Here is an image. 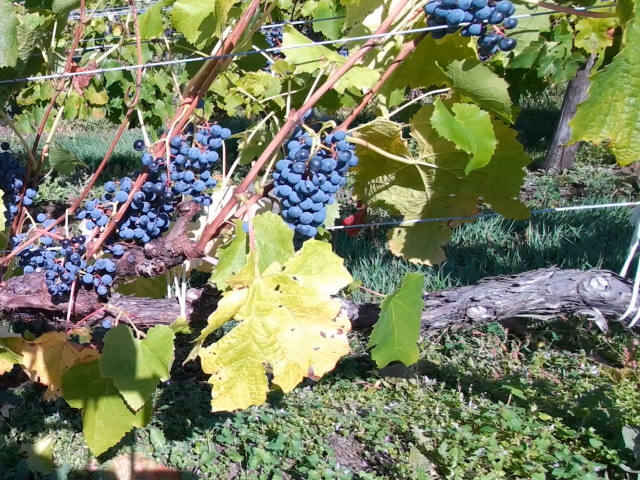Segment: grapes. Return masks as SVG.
<instances>
[{
    "label": "grapes",
    "instance_id": "e5b3c951",
    "mask_svg": "<svg viewBox=\"0 0 640 480\" xmlns=\"http://www.w3.org/2000/svg\"><path fill=\"white\" fill-rule=\"evenodd\" d=\"M27 238H28V235L26 233L15 234L14 236H11L9 238V244L11 245V248L14 250L15 248L18 247V245L21 243L22 240H26Z\"/></svg>",
    "mask_w": 640,
    "mask_h": 480
},
{
    "label": "grapes",
    "instance_id": "5460f4e3",
    "mask_svg": "<svg viewBox=\"0 0 640 480\" xmlns=\"http://www.w3.org/2000/svg\"><path fill=\"white\" fill-rule=\"evenodd\" d=\"M132 187V179L130 177H122L120 179V184L118 185V191L116 195L111 196L109 193H114L117 188V183L115 181H106L104 183V190L107 193L102 195V200L100 198H94L92 200H88L85 203V209H78L76 211V218L78 220H86L89 219L85 223V228L87 230H94L97 226H107L109 223V216L107 214H102V201L104 203H124L127 201L128 192Z\"/></svg>",
    "mask_w": 640,
    "mask_h": 480
},
{
    "label": "grapes",
    "instance_id": "84f90ec7",
    "mask_svg": "<svg viewBox=\"0 0 640 480\" xmlns=\"http://www.w3.org/2000/svg\"><path fill=\"white\" fill-rule=\"evenodd\" d=\"M86 237L84 235L72 236L70 239H64L60 246V254L66 255L67 262L65 267L60 263H54V259L57 256L55 249L44 250L42 247L29 244L17 254L20 260L27 261L28 265L22 267L24 274L32 273L36 270V266L40 269H48L45 273V283L48 285V292L50 295L56 294L62 295L65 291L71 289L70 283H72L80 270H84L87 274L82 276L84 283H92L95 285L96 292L100 295L107 293V286L113 282L111 275L95 276L92 274L95 271H104L105 273H114L116 265L107 257H99L93 262L92 265H87V262L82 258V254L86 251Z\"/></svg>",
    "mask_w": 640,
    "mask_h": 480
},
{
    "label": "grapes",
    "instance_id": "0513c4c2",
    "mask_svg": "<svg viewBox=\"0 0 640 480\" xmlns=\"http://www.w3.org/2000/svg\"><path fill=\"white\" fill-rule=\"evenodd\" d=\"M425 11L430 14L427 24L452 25L448 30L431 31L433 39H442L447 34H453L460 30L463 37L483 35L478 39V58L486 61L497 51H512L518 46L514 37L503 35H484L487 32L485 25L460 27L462 21L489 20L491 25H499L504 18L503 27L506 30L515 29L518 20L511 17L515 13L514 3L511 0H433L425 4Z\"/></svg>",
    "mask_w": 640,
    "mask_h": 480
},
{
    "label": "grapes",
    "instance_id": "83cd7487",
    "mask_svg": "<svg viewBox=\"0 0 640 480\" xmlns=\"http://www.w3.org/2000/svg\"><path fill=\"white\" fill-rule=\"evenodd\" d=\"M36 196V190L28 186L25 191V196H23L22 203L26 206H31L33 204V198Z\"/></svg>",
    "mask_w": 640,
    "mask_h": 480
},
{
    "label": "grapes",
    "instance_id": "f8a65327",
    "mask_svg": "<svg viewBox=\"0 0 640 480\" xmlns=\"http://www.w3.org/2000/svg\"><path fill=\"white\" fill-rule=\"evenodd\" d=\"M26 168L17 160H13L10 152H0V189L4 193L1 200L7 209L3 212L6 217L4 226H12L14 215L17 213V203L19 202L18 192L24 182Z\"/></svg>",
    "mask_w": 640,
    "mask_h": 480
},
{
    "label": "grapes",
    "instance_id": "b958b902",
    "mask_svg": "<svg viewBox=\"0 0 640 480\" xmlns=\"http://www.w3.org/2000/svg\"><path fill=\"white\" fill-rule=\"evenodd\" d=\"M347 133L336 130L324 138L328 146L335 144L337 159L320 149L310 159L313 138L296 125L286 140L288 155L279 159L272 172L274 196L281 199V214L288 227L295 228L298 235L316 237L320 226L327 219L328 205L335 203L334 193L348 183L344 175L349 167H356V145L348 143ZM308 169L314 173L312 180L306 181L303 173Z\"/></svg>",
    "mask_w": 640,
    "mask_h": 480
},
{
    "label": "grapes",
    "instance_id": "01657485",
    "mask_svg": "<svg viewBox=\"0 0 640 480\" xmlns=\"http://www.w3.org/2000/svg\"><path fill=\"white\" fill-rule=\"evenodd\" d=\"M229 127L213 124L211 128H201L195 134V141L205 145L203 150L184 144L180 135L170 141L169 158L170 179L174 183L172 189L167 185L168 174L160 176V166L165 162L163 156L153 161L152 155L144 152L140 155L141 163L148 167V177L143 183L142 191L133 195L131 206L126 211V218L117 223V230L105 239L103 251L113 255H122L124 247L114 244L120 239H139L148 243L152 236L161 234V227L170 226L169 214L174 209L173 198L177 193L190 195L198 205L210 207L213 199L207 194H200L214 189L217 181L211 178V167L219 161L216 150L224 145L223 140L231 137Z\"/></svg>",
    "mask_w": 640,
    "mask_h": 480
},
{
    "label": "grapes",
    "instance_id": "2adb6a1f",
    "mask_svg": "<svg viewBox=\"0 0 640 480\" xmlns=\"http://www.w3.org/2000/svg\"><path fill=\"white\" fill-rule=\"evenodd\" d=\"M37 220H38L40 223H43V225H44L45 227L50 226V225H52V224H55V223H56V220H55L54 218H47V219H46V215H45L44 213H39V214L37 215Z\"/></svg>",
    "mask_w": 640,
    "mask_h": 480
}]
</instances>
